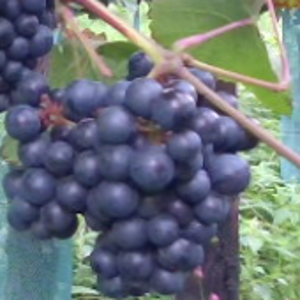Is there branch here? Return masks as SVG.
I'll use <instances>...</instances> for the list:
<instances>
[{"label": "branch", "instance_id": "obj_1", "mask_svg": "<svg viewBox=\"0 0 300 300\" xmlns=\"http://www.w3.org/2000/svg\"><path fill=\"white\" fill-rule=\"evenodd\" d=\"M88 8L99 16H104V20L121 34L127 36L134 44L145 49L150 54L154 55L157 62L155 67L147 74L149 79H155L160 75L174 72L181 76L183 79L188 80L191 84L198 88V93L203 96L208 102H210L218 110L224 112L230 118L239 124L244 130L253 134L263 144L269 148L275 150L277 153L284 156L290 163L295 166H300V156L295 154L290 148L280 143L265 131L259 128L256 124L249 121L240 111H237L234 107L224 102L220 97L214 94L208 87L204 85V82L197 76L193 75L184 67L182 58L172 51H165L154 45L148 39L139 35L132 27L126 25L121 20L116 18L112 13H107V9L104 5H99L96 1H90Z\"/></svg>", "mask_w": 300, "mask_h": 300}]
</instances>
